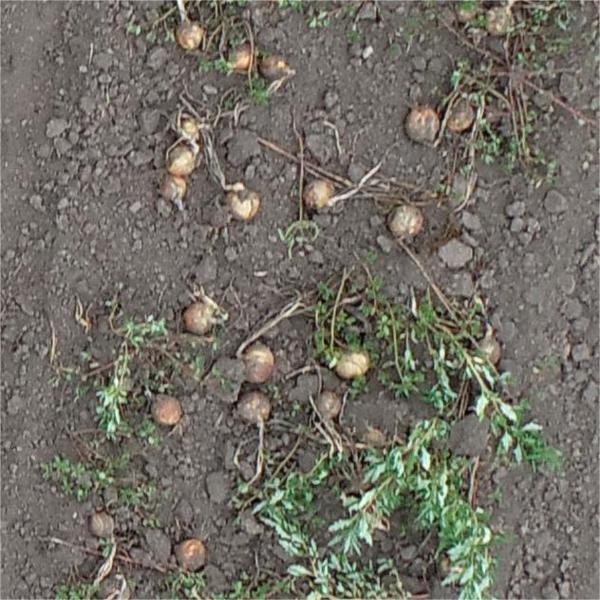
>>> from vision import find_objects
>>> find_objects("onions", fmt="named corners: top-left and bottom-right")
top-left (477, 336), bottom-right (502, 362)
top-left (444, 101), bottom-right (472, 133)
top-left (301, 178), bottom-right (334, 212)
top-left (262, 53), bottom-right (290, 77)
top-left (165, 143), bottom-right (197, 172)
top-left (183, 302), bottom-right (219, 332)
top-left (174, 114), bottom-right (200, 141)
top-left (455, 1), bottom-right (480, 22)
top-left (483, 6), bottom-right (513, 34)
top-left (233, 390), bottom-right (270, 424)
top-left (222, 184), bottom-right (259, 220)
top-left (385, 202), bottom-right (422, 239)
top-left (96, 574), bottom-right (127, 600)
top-left (227, 45), bottom-right (253, 71)
top-left (85, 510), bottom-right (111, 536)
top-left (157, 175), bottom-right (186, 202)
top-left (313, 391), bottom-right (341, 417)
top-left (174, 21), bottom-right (203, 49)
top-left (150, 394), bottom-right (183, 428)
top-left (239, 341), bottom-right (273, 381)
top-left (333, 347), bottom-right (367, 379)
top-left (174, 537), bottom-right (206, 570)
top-left (404, 106), bottom-right (437, 142)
